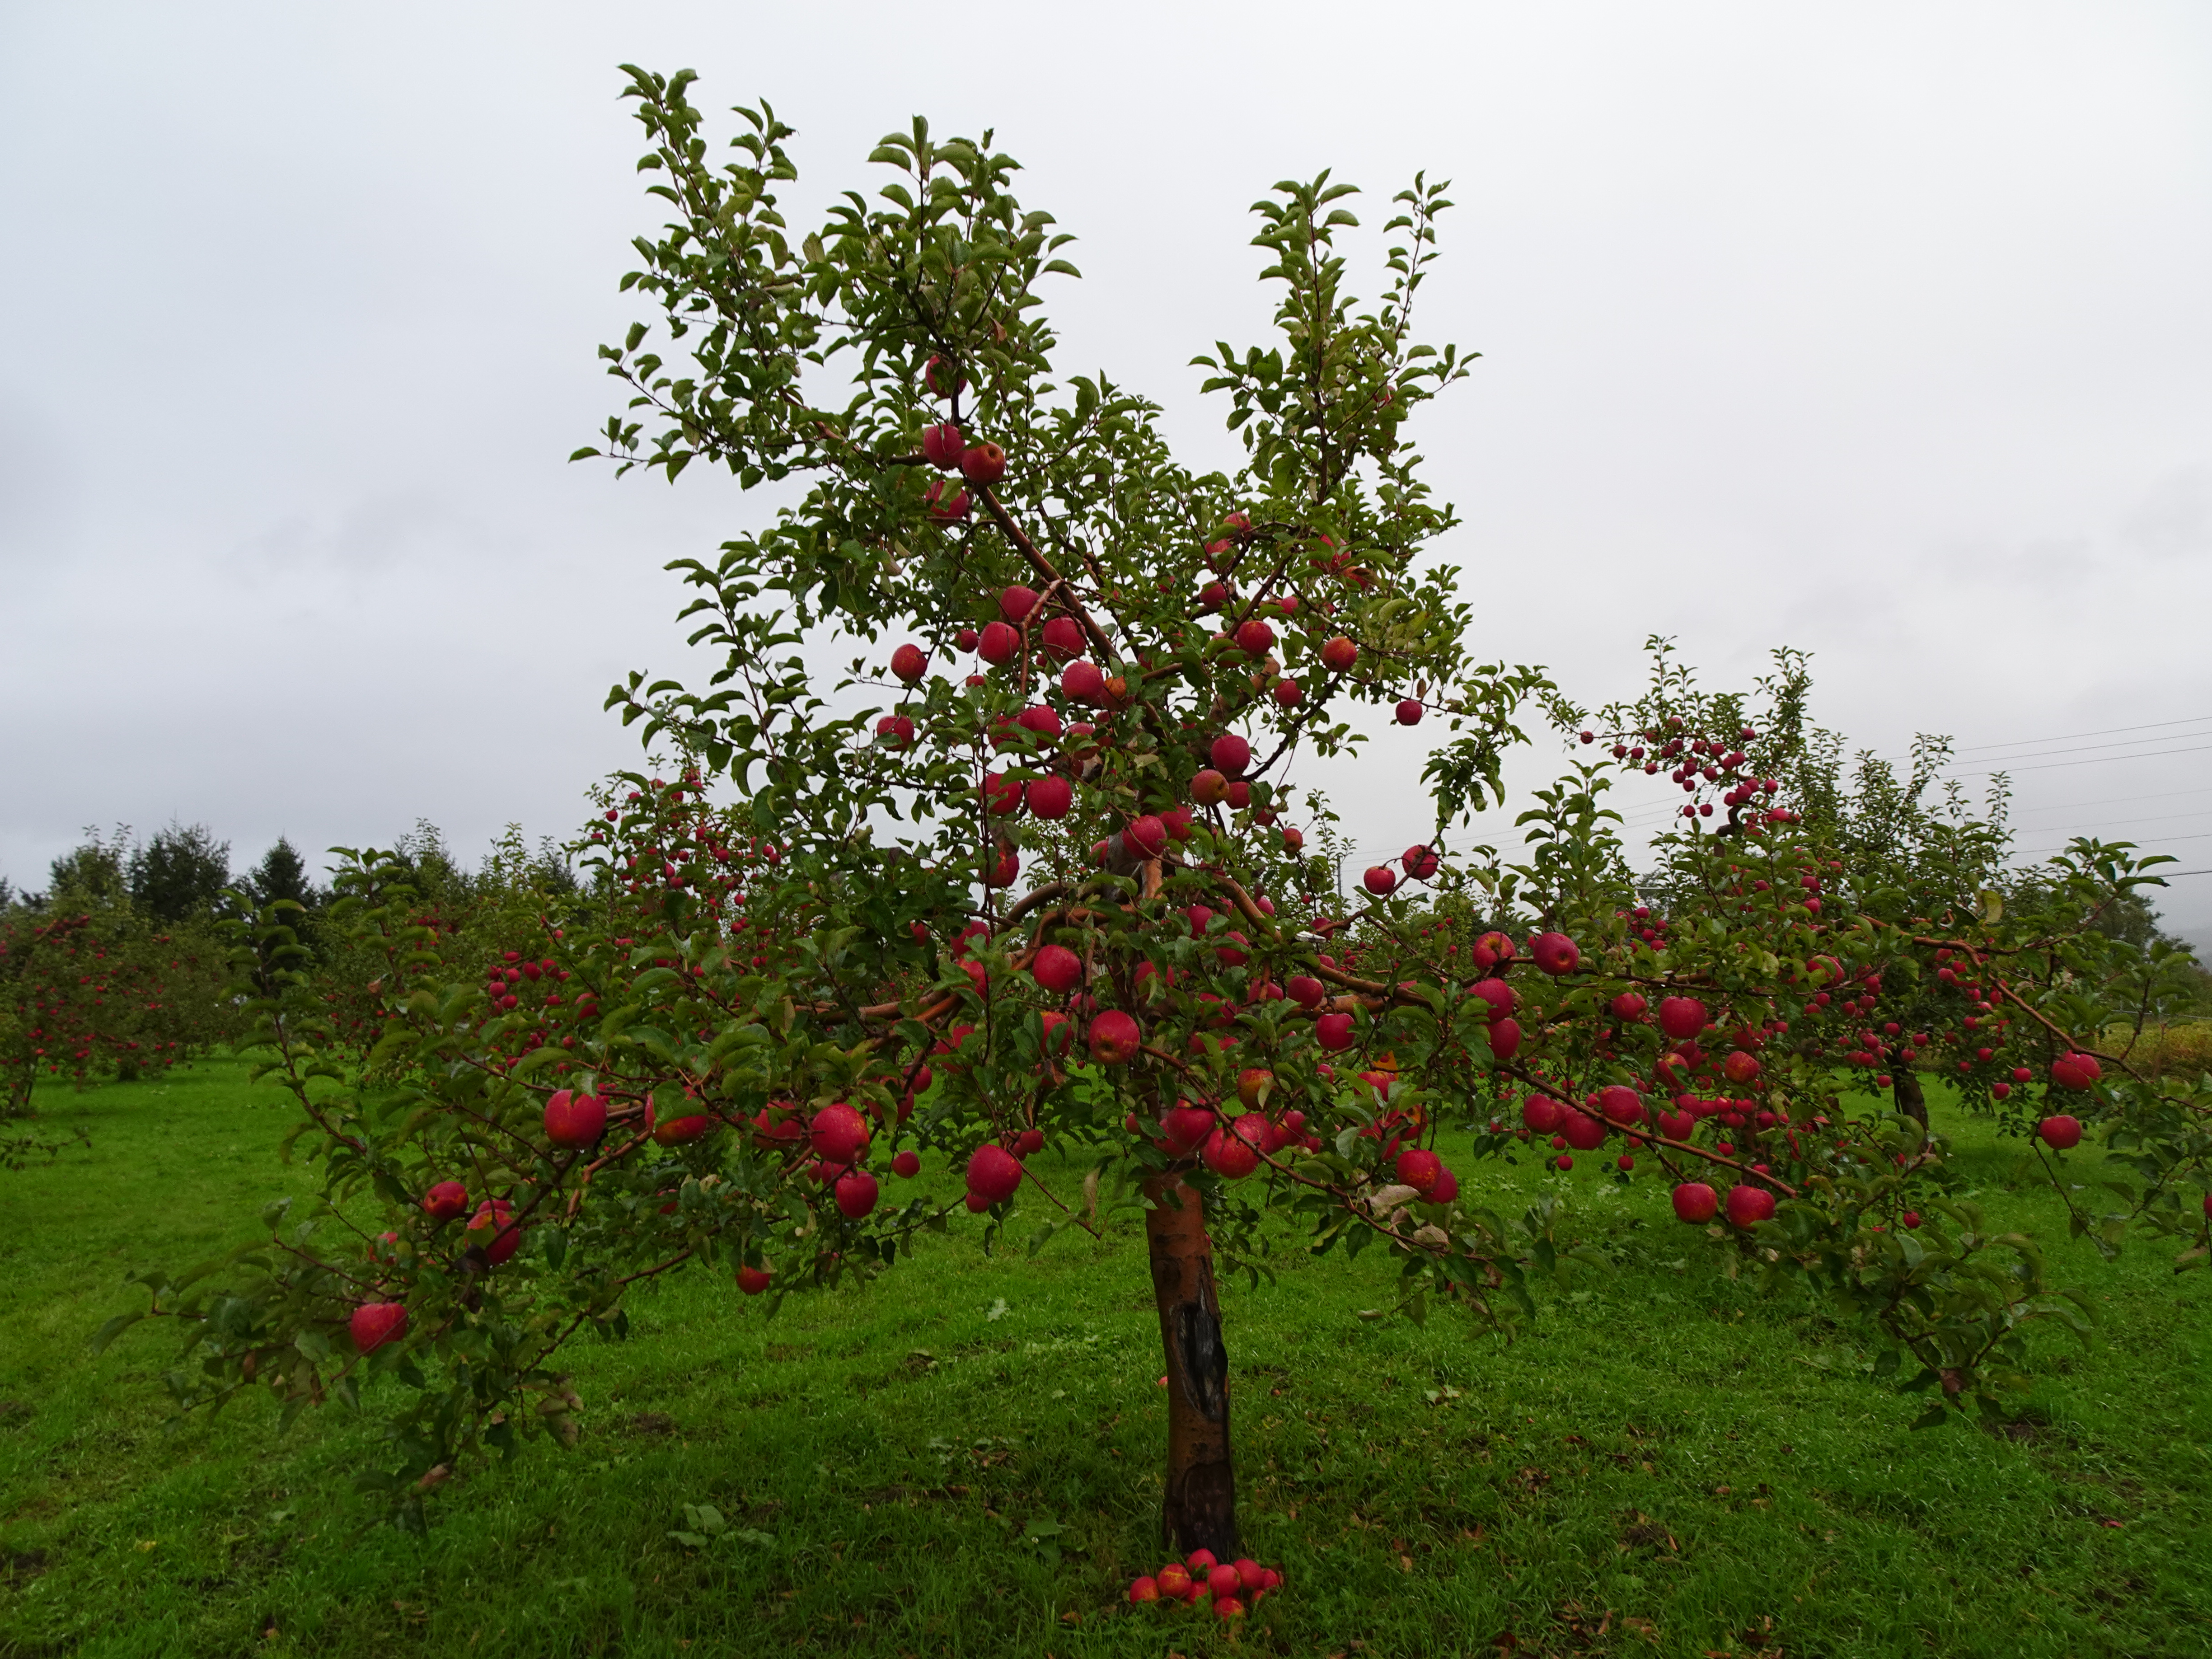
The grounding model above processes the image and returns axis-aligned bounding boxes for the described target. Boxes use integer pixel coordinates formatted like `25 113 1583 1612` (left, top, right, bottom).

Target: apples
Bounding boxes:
1033 619 1045 641
644 1086 708 1147
1238 1069 1275 1111
1100 675 1135 711
1219 1035 1241 1069
891 643 927 681
1213 897 1236 916
1039 1011 1072 1055
1247 977 1283 1003
1396 700 1422 725
809 1103 870 1164
466 1210 520 1265
1212 931 1250 969
1302 895 1310 904
1100 590 1119 606
1298 1134 1321 1155
858 1075 879 1106
1167 1098 1218 1151
1318 532 1346 558
1004 1131 1020 1145
908 922 930 947
1064 723 1100 760
2052 1049 2100 1090
1318 1124 1341 1131
951 921 990 959
846 1050 868 1064
2039 1115 2084 1150
954 958 991 1001
1685 1051 1703 1071
876 716 914 751
1357 1119 1400 1160
1342 566 1368 591
1402 844 1438 880
1316 1013 1356 1052
1052 754 1084 782
1233 1113 1273 1163
1032 944 1081 993
1653 1053 1687 1087
1282 828 1302 853
868 1076 914 1124
1170 633 1185 650
574 992 603 1021
1287 976 1324 1010
1205 538 1232 563
1566 1108 1607 1150
1095 711 1116 730
425 1178 469 1222
1122 815 1167 860
978 621 1021 666
1384 1104 1428 1141
1189 769 1229 806
350 1302 408 1356
965 1192 988 1213
1321 636 1357 673
1316 954 1334 969
1199 1144 1215 1171
1011 1142 1028 1161
1187 905 1213 941
1724 1050 1760 1085
831 1089 849 1104
1611 992 1648 1022
924 425 965 470
1019 1130 1043 1154
1223 512 1251 542
1042 617 1087 662
1090 697 1107 709
1726 1185 1776 1233
1396 1149 1441 1195
1181 969 1190 979
1274 680 1302 707
1372 386 1395 411
955 629 979 653
544 1090 607 1150
1017 705 1061 751
1672 1038 1695 1058
892 1152 920 1179
1672 1183 1718 1224
1256 1111 1290 1154
1089 1011 1140 1065
1134 961 1174 999
1479 1017 1521 1060
656 1190 677 1215
1364 866 1395 895
1659 996 1706 1040
1331 550 1351 567
1181 721 1195 730
965 1144 1022 1202
736 1264 770 1294
1157 576 1174 594
1354 1070 1396 1111
1027 774 1072 819
1097 735 1116 751
1260 1023 1296 1054
1305 618 1325 637
711 1110 752 1133
1661 1109 1694 1142
1225 782 1251 809
1594 1027 1616 1060
1418 1167 1457 1205
1277 1108 1303 1146
1125 1111 1142 1135
1641 1104 1663 1126
1211 735 1250 779
1733 1022 1766 1050
979 851 1019 888
1153 1118 1188 1162
1600 1085 1642 1126
1316 1063 1333 1084
1091 840 1108 867
1198 993 1240 1029
1255 897 1275 917
998 836 1019 854
1806 955 1844 991
999 1130 1012 1151
1207 1124 1259 1179
962 440 1005 483
1108 768 1134 791
1533 933 1579 976
1280 596 1300 616
926 481 969 527
925 353 967 398
1469 977 1514 1023
1200 580 1228 609
1555 1104 1577 1140
369 1232 400 1267
979 773 1023 816
1159 805 1194 842
1316 597 1335 615
1177 908 1185 935
834 1170 878 1218
1001 585 1044 630
966 675 985 687
476 1199 512 1214
1207 556 1234 574
1077 1059 1085 1069
935 1025 974 1074
1237 620 1273 656
1309 548 1335 574
988 716 1018 750
1523 1094 1565 1135
1061 661 1104 705
1187 1032 1212 1071
1070 994 1096 1011
1671 1094 1702 1122
749 1102 804 1151
1036 654 1048 673
1310 917 1333 940
1254 804 1276 826
902 1066 932 1094
1211 633 1241 668
1472 931 1517 977
362 1281 387 1303
1138 652 1153 671
1135 599 1140 617
1060 1044 1070 1059
402 1258 437 1283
